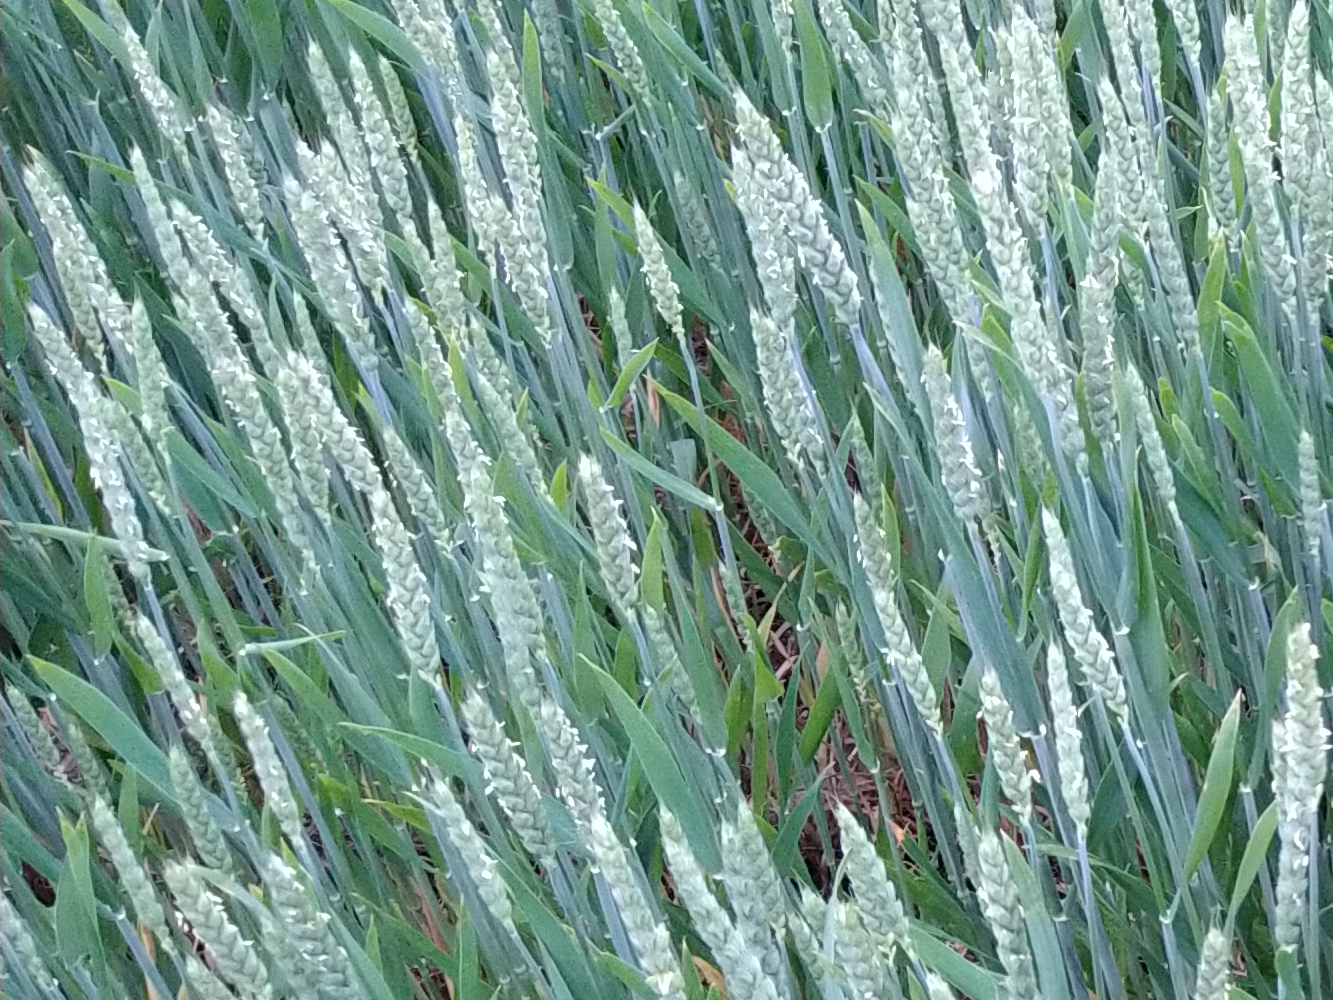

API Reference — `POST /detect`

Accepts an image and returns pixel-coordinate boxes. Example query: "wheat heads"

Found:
[1243,150,1297,310]
[1315,75,1333,211]
[807,891,836,936]
[272,699,329,777]
[370,495,442,678]
[98,0,193,162]
[1206,94,1237,234]
[519,0,567,83]
[874,0,902,84]
[837,603,873,706]
[236,271,286,377]
[889,112,938,220]
[171,204,239,310]
[263,858,361,1000]
[429,199,466,338]
[979,671,1031,818]
[1191,929,1231,1000]
[1138,0,1200,56]
[134,618,211,751]
[970,161,1049,378]
[487,199,551,341]
[976,832,1041,1000]
[89,799,170,941]
[293,293,330,382]
[610,290,632,366]
[380,56,418,155]
[1099,0,1150,139]
[346,144,386,290]
[233,693,304,847]
[835,802,912,940]
[738,791,782,929]
[927,975,980,1000]
[278,372,330,519]
[926,73,954,173]
[633,204,683,327]
[1115,0,1162,79]
[304,192,368,325]
[168,748,236,882]
[23,170,92,285]
[1298,432,1322,548]
[1010,21,1049,222]
[401,223,446,318]
[459,700,558,860]
[372,0,436,66]
[874,949,904,1000]
[164,867,275,1000]
[288,355,379,488]
[1303,153,1332,313]
[104,402,171,510]
[1099,81,1147,236]
[78,380,107,489]
[444,418,497,572]
[1266,0,1284,74]
[283,183,350,342]
[1026,0,1057,44]
[1041,513,1129,720]
[1014,402,1047,489]
[955,806,981,884]
[807,0,843,54]
[1271,800,1312,948]
[926,0,993,128]
[405,304,458,418]
[209,749,251,806]
[486,559,549,671]
[1044,343,1086,459]
[939,38,993,180]
[430,782,516,933]
[1222,17,1253,152]
[349,52,414,221]
[491,99,544,262]
[1282,1,1314,199]
[537,708,607,873]
[1128,367,1179,524]
[741,484,785,561]
[850,496,890,595]
[471,321,521,415]
[757,0,794,49]
[99,439,151,581]
[302,147,385,276]
[186,275,247,373]
[589,0,651,99]
[7,689,73,783]
[487,512,548,660]
[776,326,823,455]
[486,56,543,193]
[788,915,826,981]
[1020,13,1072,190]
[885,0,925,93]
[207,110,266,241]
[474,376,546,495]
[1145,187,1201,352]
[212,363,302,540]
[100,559,136,635]
[701,903,799,1000]
[34,162,132,350]
[0,890,55,986]
[382,431,449,548]
[53,243,106,355]
[835,909,865,1000]
[927,166,969,274]
[749,313,800,469]
[185,958,276,1000]
[734,100,861,320]
[675,173,721,266]
[1242,14,1263,119]
[588,820,686,1000]
[659,812,719,929]
[921,350,999,539]
[578,457,639,612]
[812,0,884,104]
[405,0,460,70]
[849,417,884,518]
[894,81,939,160]
[455,119,495,261]
[1079,281,1117,440]
[171,296,210,361]
[28,307,102,410]
[129,147,187,290]
[469,0,521,89]
[307,43,364,168]
[1271,722,1286,823]
[840,833,894,955]
[719,563,753,645]
[68,722,112,805]
[876,586,943,728]
[1047,644,1091,825]
[131,303,171,451]
[220,110,268,183]
[1089,152,1120,294]
[732,154,798,322]
[721,817,780,999]
[1305,93,1321,176]
[1285,625,1328,810]
[641,605,701,719]
[994,31,1015,133]
[958,304,996,396]
[906,199,954,303]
